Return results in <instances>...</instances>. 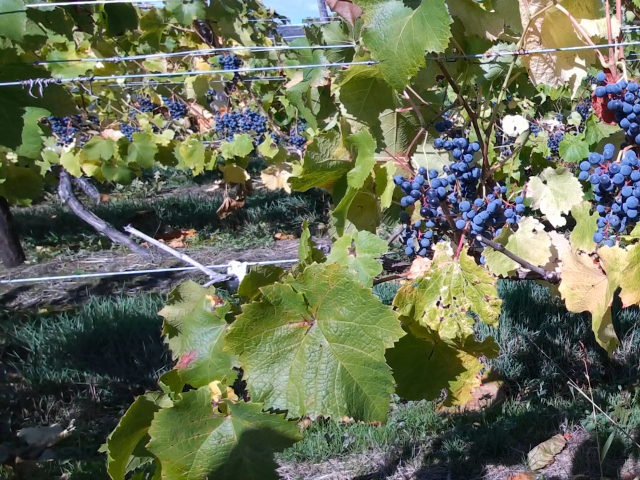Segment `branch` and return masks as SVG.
<instances>
[{
	"mask_svg": "<svg viewBox=\"0 0 640 480\" xmlns=\"http://www.w3.org/2000/svg\"><path fill=\"white\" fill-rule=\"evenodd\" d=\"M518 60V56L514 55L511 58V62L509 64V68L505 77V80L502 83L501 86V92L500 95L498 97V101L496 104V107L493 110V113L491 114L490 120L487 124V127L485 129V140L483 141L482 138V134L481 131L479 129V126L476 122V119L473 115V113L470 110V107L467 103V101L465 100L464 96H461L460 99H458L457 101H455L454 103H450L447 106H444L443 108H441L430 120L426 121L424 124H422L414 133V136L410 142V144L408 145L404 157H403V163L405 164V166L408 168L409 173L411 175L415 174L413 165L410 163L409 161V156L411 154V151L413 150L414 146L417 143V140L420 136V134L426 129L428 128L430 125L434 124L445 112L452 110L453 108L458 107L460 104L463 105L465 112L467 114V116L470 119V122L472 124V127L475 131L476 137H477V141L479 144V148H480V152L483 153V175L478 179V184H477V194L481 195L482 194V186H483V182L487 179L488 177V146L490 143V132L491 129L493 127V124L495 122V119L502 107V103H503V99L506 95V92L508 90V83L510 82L516 61Z\"/></svg>",
	"mask_w": 640,
	"mask_h": 480,
	"instance_id": "30e6481e",
	"label": "branch"
},
{
	"mask_svg": "<svg viewBox=\"0 0 640 480\" xmlns=\"http://www.w3.org/2000/svg\"><path fill=\"white\" fill-rule=\"evenodd\" d=\"M558 3H559V0H553V1L549 2L545 7L537 10L536 12L532 13L529 16V18L527 19V21L524 24L523 29H522V31L520 33L519 40H518V43H517V46H516L517 50H521L522 49V46H523L524 39H525V36L527 34L528 28L532 24L533 20L535 18H537L538 16L548 12L553 6L557 5Z\"/></svg>",
	"mask_w": 640,
	"mask_h": 480,
	"instance_id": "325d2c04",
	"label": "branch"
},
{
	"mask_svg": "<svg viewBox=\"0 0 640 480\" xmlns=\"http://www.w3.org/2000/svg\"><path fill=\"white\" fill-rule=\"evenodd\" d=\"M608 69L609 72L612 76V78L615 81H618L620 79V75H619V70L617 67V63H616V59H615V53H614V48L608 49Z\"/></svg>",
	"mask_w": 640,
	"mask_h": 480,
	"instance_id": "170604dd",
	"label": "branch"
},
{
	"mask_svg": "<svg viewBox=\"0 0 640 480\" xmlns=\"http://www.w3.org/2000/svg\"><path fill=\"white\" fill-rule=\"evenodd\" d=\"M437 66L439 67V69L442 71L443 77L446 80V82L449 84V86L451 87L452 91L454 93L458 92V88L456 87L455 83L452 81V79L450 78L447 68L443 65L441 60L437 61Z\"/></svg>",
	"mask_w": 640,
	"mask_h": 480,
	"instance_id": "45aa463d",
	"label": "branch"
}]
</instances>
